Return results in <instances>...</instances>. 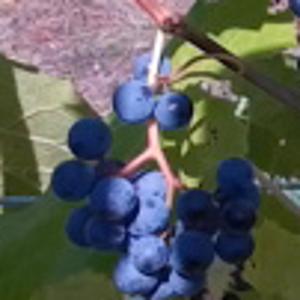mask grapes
<instances>
[{"instance_id": "b958b902", "label": "grapes", "mask_w": 300, "mask_h": 300, "mask_svg": "<svg viewBox=\"0 0 300 300\" xmlns=\"http://www.w3.org/2000/svg\"><path fill=\"white\" fill-rule=\"evenodd\" d=\"M153 53L140 52L133 64V80L120 82L113 92V110L124 122L145 124L153 117L160 131H178L195 117V103L184 92L168 90L154 97L149 89Z\"/></svg>"}, {"instance_id": "01657485", "label": "grapes", "mask_w": 300, "mask_h": 300, "mask_svg": "<svg viewBox=\"0 0 300 300\" xmlns=\"http://www.w3.org/2000/svg\"><path fill=\"white\" fill-rule=\"evenodd\" d=\"M116 132L100 118H81L68 130L75 158L96 161L61 163L53 172V191L81 203L65 224L73 247L118 253L111 273L114 289L162 300L200 296L202 274L217 257L226 263L252 258L249 233L261 207L255 174L240 157L222 160L214 174L215 195L205 189L168 185L164 172L143 170L128 177L118 158L108 155Z\"/></svg>"}]
</instances>
